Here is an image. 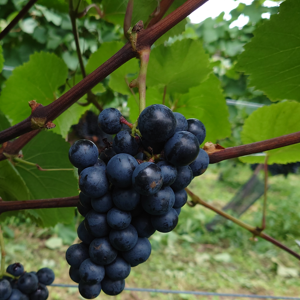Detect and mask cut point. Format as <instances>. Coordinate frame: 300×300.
Masks as SVG:
<instances>
[{
  "label": "cut point",
  "instance_id": "obj_1",
  "mask_svg": "<svg viewBox=\"0 0 300 300\" xmlns=\"http://www.w3.org/2000/svg\"><path fill=\"white\" fill-rule=\"evenodd\" d=\"M151 46L147 45L138 51L140 57V73L139 77L132 80L129 84L130 88H139V114L145 108V81H146V67L149 61Z\"/></svg>",
  "mask_w": 300,
  "mask_h": 300
}]
</instances>
